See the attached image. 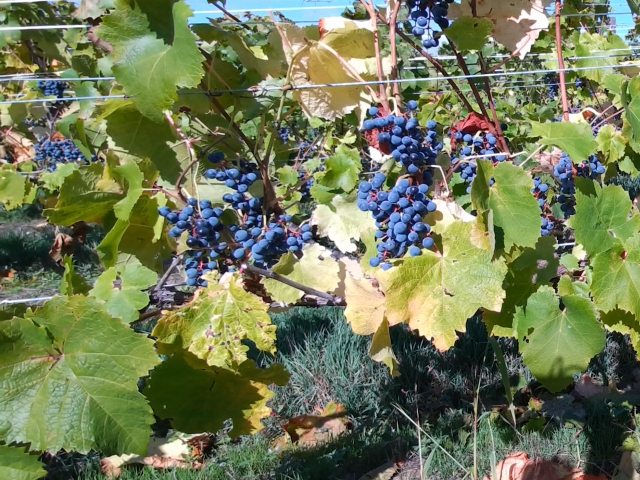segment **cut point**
<instances>
[{"mask_svg": "<svg viewBox=\"0 0 640 480\" xmlns=\"http://www.w3.org/2000/svg\"><path fill=\"white\" fill-rule=\"evenodd\" d=\"M196 165H197V166L195 167V172H194V175H193V185H194L195 193H199V190H198V187H197V182H196V178H197V174H198V169L200 168L199 160H198V162L196 163Z\"/></svg>", "mask_w": 640, "mask_h": 480, "instance_id": "cut-point-1", "label": "cut point"}, {"mask_svg": "<svg viewBox=\"0 0 640 480\" xmlns=\"http://www.w3.org/2000/svg\"><path fill=\"white\" fill-rule=\"evenodd\" d=\"M250 152H251V151L248 149V150L244 151L243 153L239 154V155H238V158H237V162H239V160H240L242 157H244L245 155H247V154H248V153H250Z\"/></svg>", "mask_w": 640, "mask_h": 480, "instance_id": "cut-point-2", "label": "cut point"}]
</instances>
